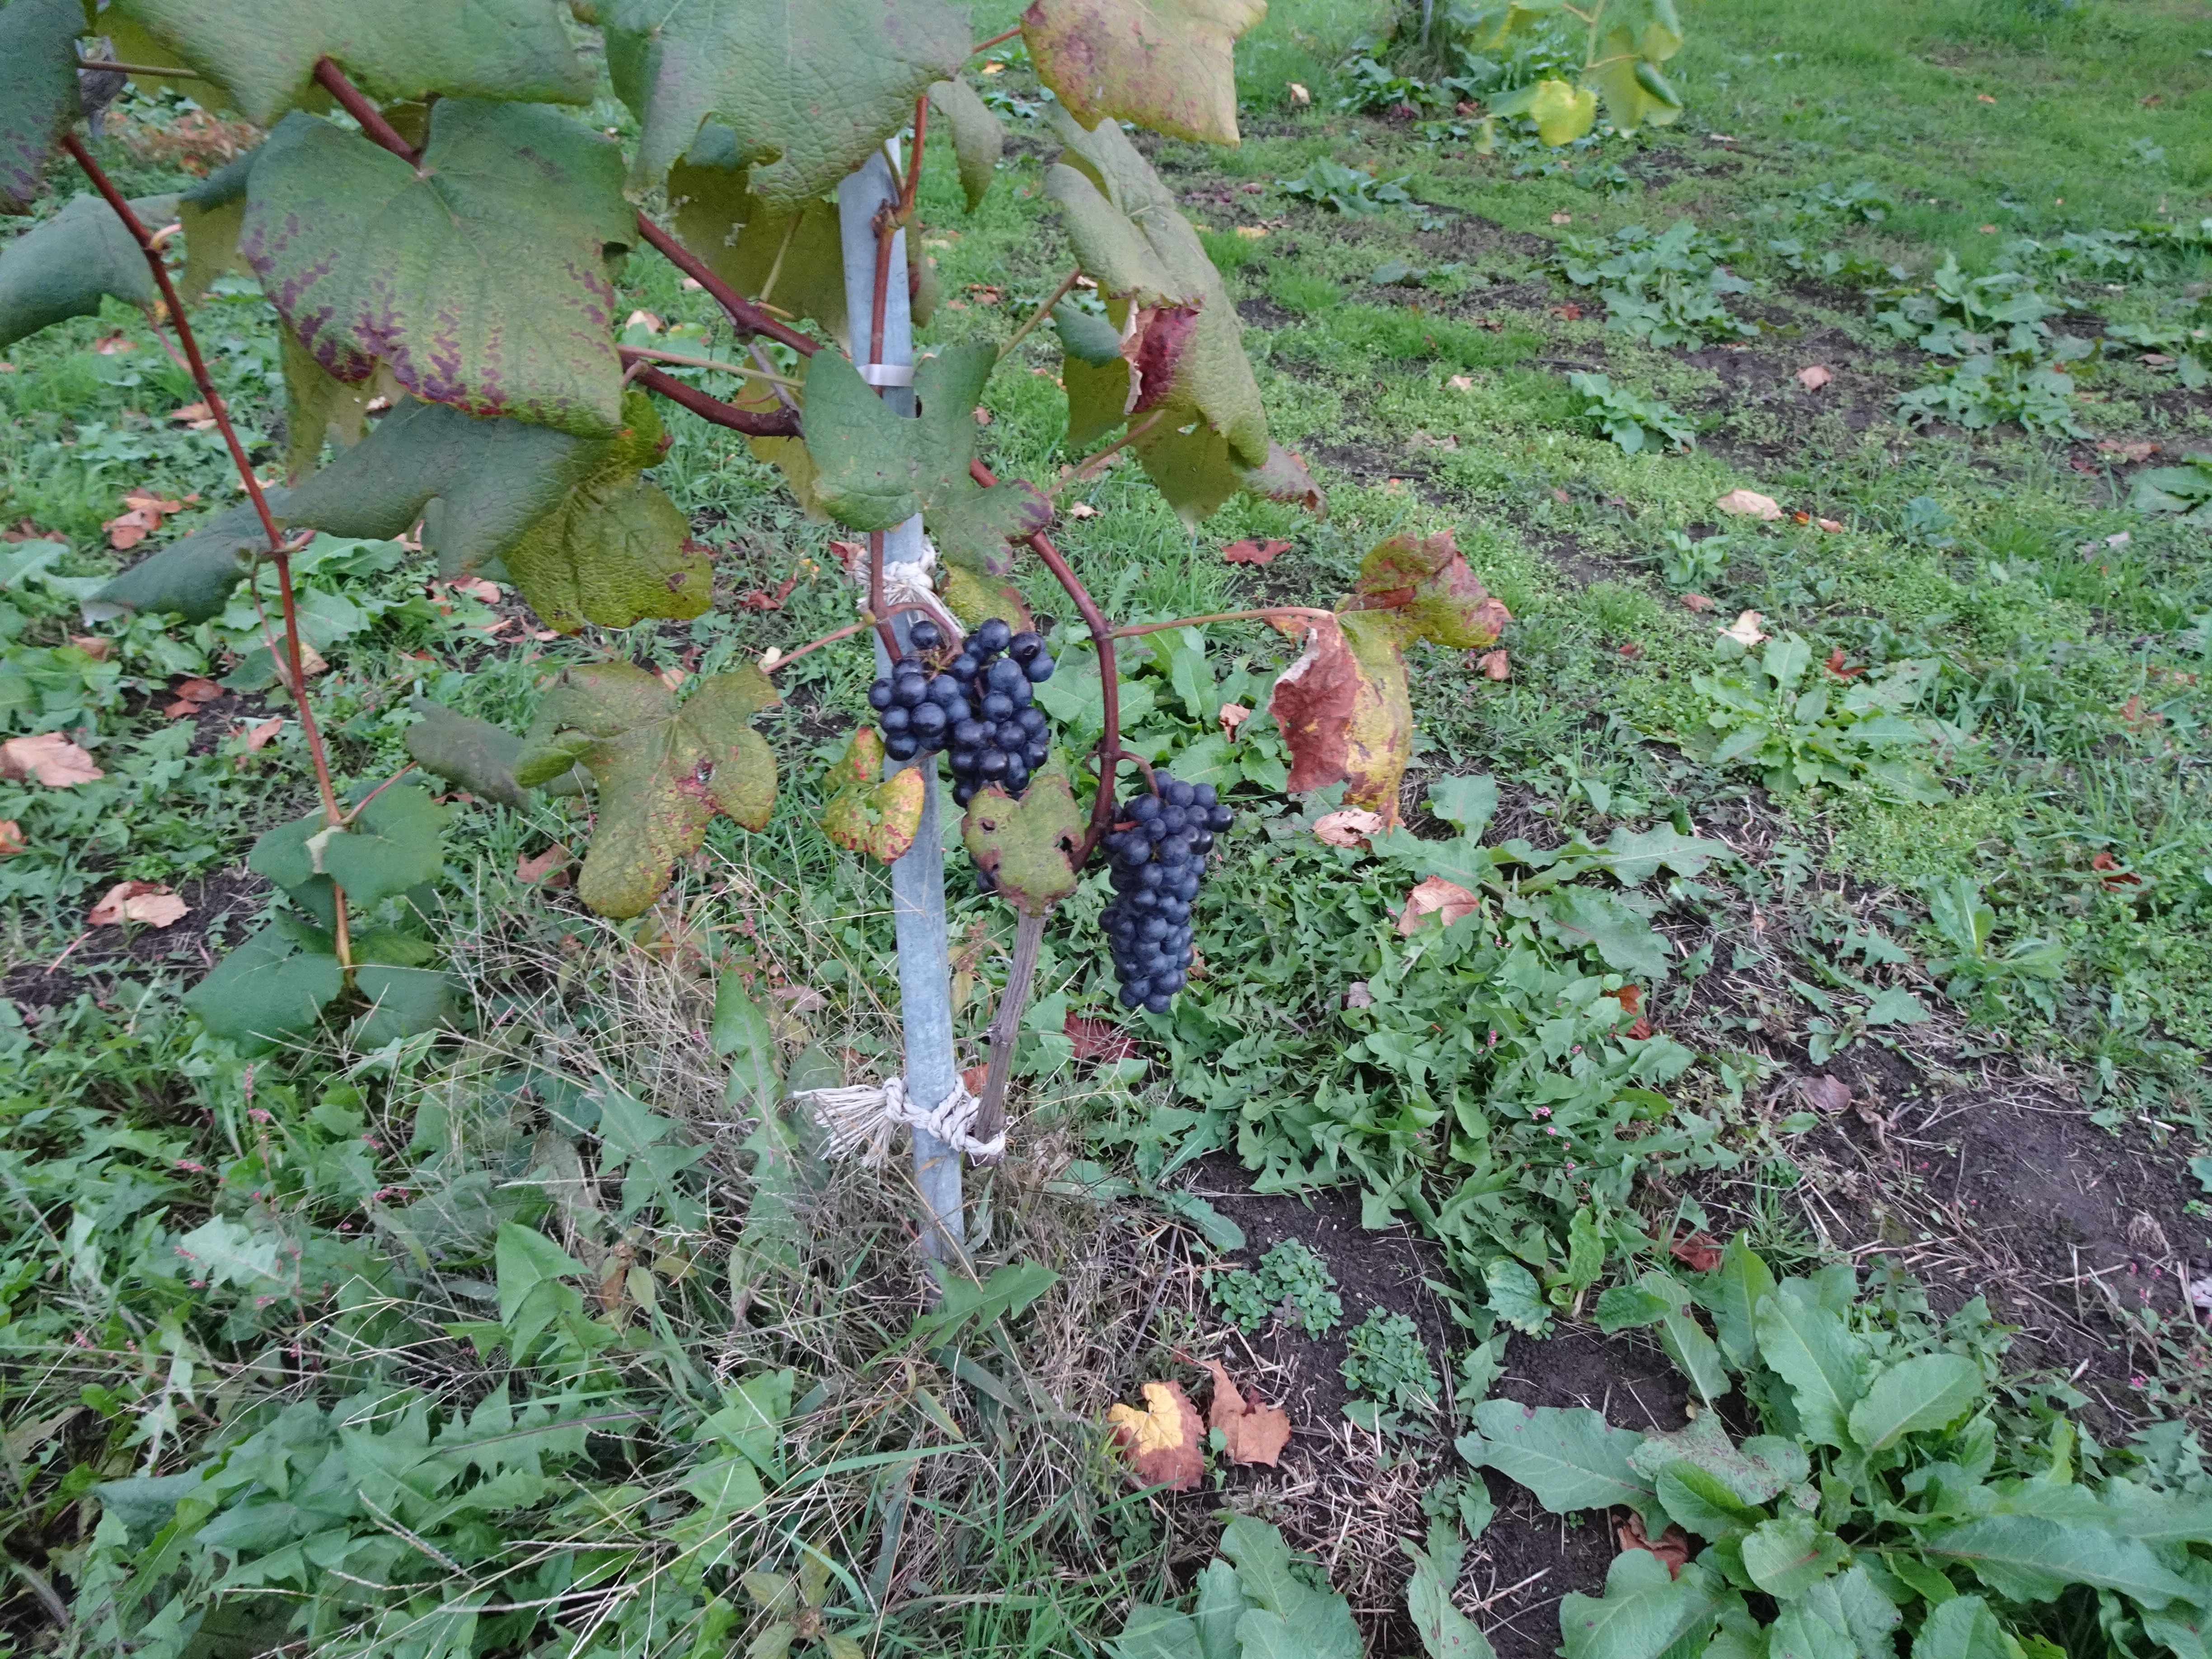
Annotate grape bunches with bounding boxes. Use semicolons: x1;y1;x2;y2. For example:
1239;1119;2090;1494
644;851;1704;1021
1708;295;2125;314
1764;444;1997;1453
1097;768;1233;1012
868;617;1054;894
